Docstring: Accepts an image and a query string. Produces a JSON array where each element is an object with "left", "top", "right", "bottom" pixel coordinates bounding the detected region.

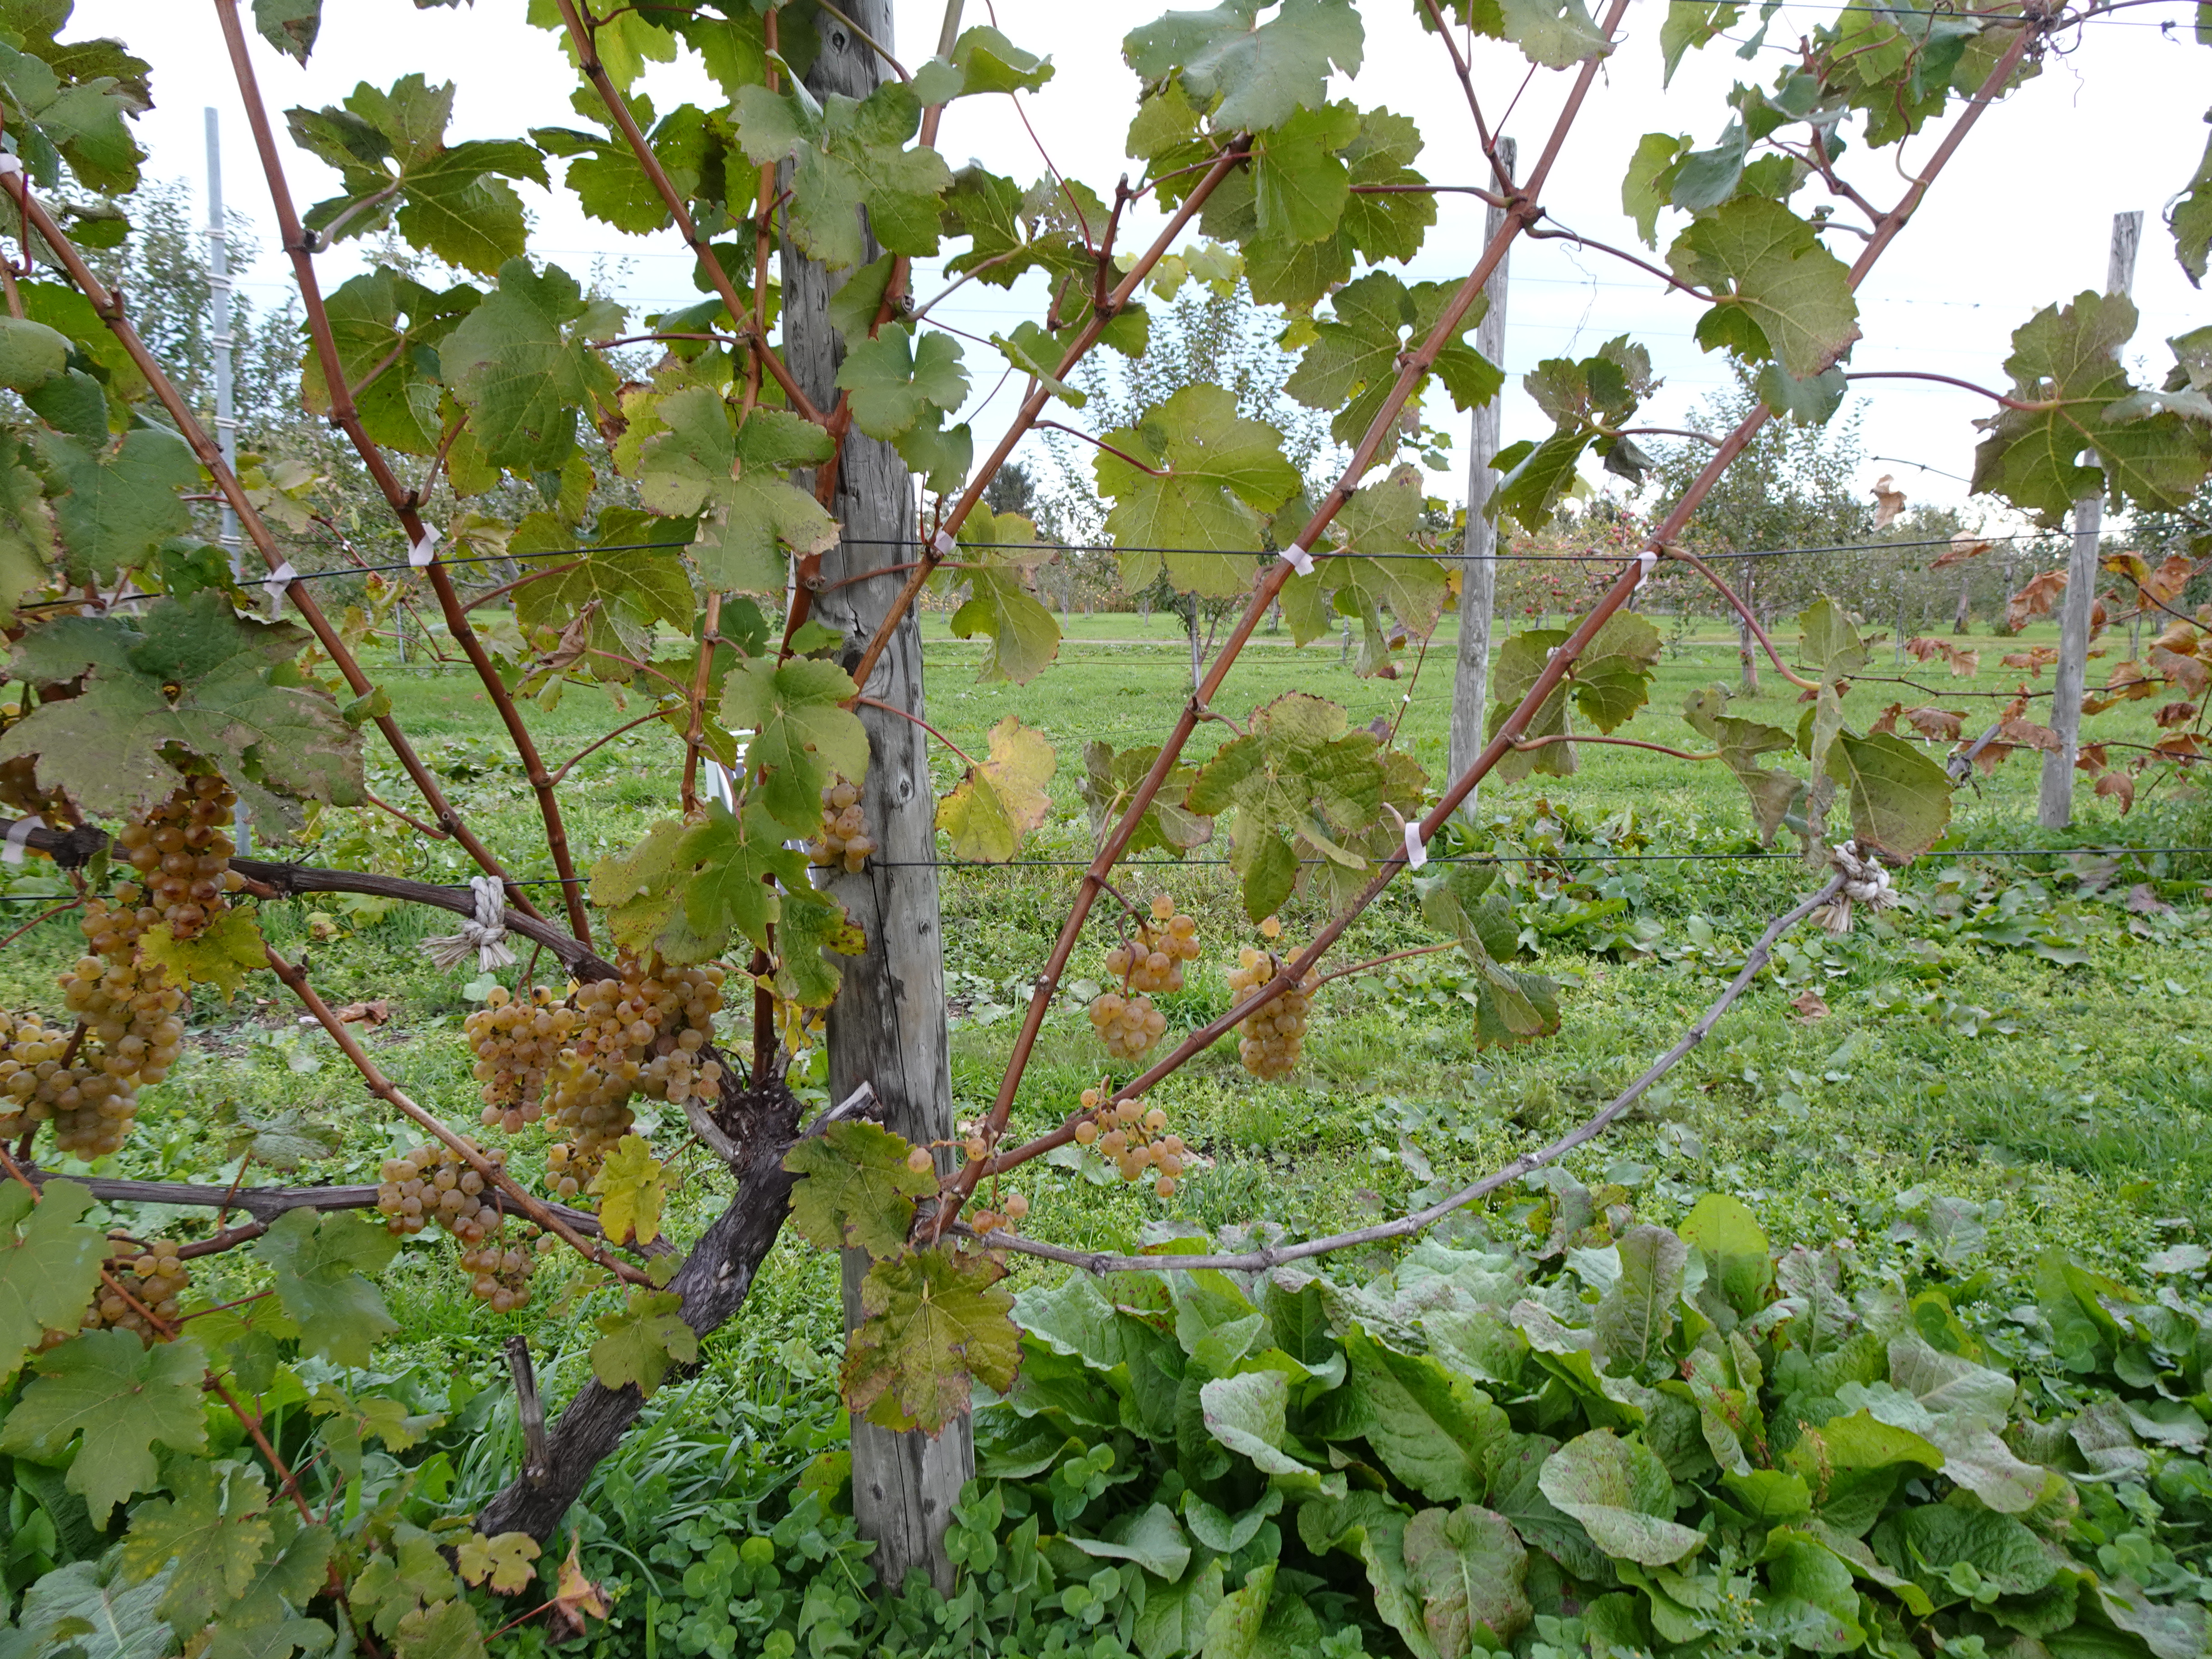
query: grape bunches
[
  {"left": 544, "top": 1144, "right": 611, "bottom": 1215},
  {"left": 807, "top": 771, "right": 867, "bottom": 876},
  {"left": 1228, "top": 917, "right": 1321, "bottom": 1083},
  {"left": 37, "top": 1028, "right": 145, "bottom": 1164},
  {"left": 59, "top": 958, "right": 182, "bottom": 1088},
  {"left": 451, "top": 1207, "right": 555, "bottom": 1312},
  {"left": 542, "top": 1050, "right": 636, "bottom": 1157},
  {"left": 119, "top": 773, "right": 246, "bottom": 941},
  {"left": 908, "top": 1138, "right": 1030, "bottom": 1237},
  {"left": 424, "top": 1140, "right": 507, "bottom": 1228},
  {"left": 378, "top": 1143, "right": 433, "bottom": 1229},
  {"left": 615, "top": 947, "right": 727, "bottom": 1104},
  {"left": 1105, "top": 894, "right": 1203, "bottom": 993},
  {"left": 463, "top": 985, "right": 574, "bottom": 1134},
  {"left": 1089, "top": 993, "right": 1168, "bottom": 1064},
  {"left": 79, "top": 880, "right": 168, "bottom": 993},
  {"left": 0, "top": 1007, "right": 67, "bottom": 1143},
  {"left": 1077, "top": 1089, "right": 1183, "bottom": 1198},
  {"left": 80, "top": 1236, "right": 194, "bottom": 1352},
  {"left": 566, "top": 975, "right": 664, "bottom": 1074}
]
